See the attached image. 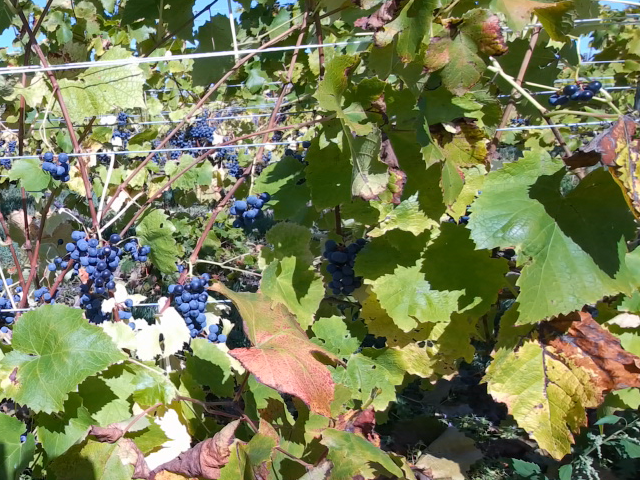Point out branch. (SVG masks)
I'll use <instances>...</instances> for the list:
<instances>
[{"instance_id": "30e6481e", "label": "branch", "mask_w": 640, "mask_h": 480, "mask_svg": "<svg viewBox=\"0 0 640 480\" xmlns=\"http://www.w3.org/2000/svg\"><path fill=\"white\" fill-rule=\"evenodd\" d=\"M57 192L56 188H52L51 191L48 194L47 197V201H46V206L44 207V209L41 212V217H40V224L38 227V237L35 241V247H34V254L32 256V246H31V240L29 237V223H28V214H27V210H26V192H25V188L21 187L20 188V195H21V213L23 215V225H24V240L26 242V249H27V259L30 263V268L31 271L29 272L28 275V282L26 284V280L25 277L23 275L21 266H20V262L19 259L17 257L16 251L13 248L12 245V238L10 235V231L9 228L6 225V222L4 220V214L0 213V225L4 231L5 234V238L7 241V247H8V251L11 254V257L14 261V265L19 277V280L21 282V286L22 289L24 291L23 293V297H22V302L20 304V307H25L27 305V299L29 296V293L31 291V287L32 284H34V288L38 289L39 288V281H38V275H37V259L39 256V249H40V244L41 241L43 239V230L45 227V220H46V214L49 211V209L51 208V203H52V199L55 195V193Z\"/></svg>"}, {"instance_id": "325d2c04", "label": "branch", "mask_w": 640, "mask_h": 480, "mask_svg": "<svg viewBox=\"0 0 640 480\" xmlns=\"http://www.w3.org/2000/svg\"><path fill=\"white\" fill-rule=\"evenodd\" d=\"M299 55V49H294V52L292 54L291 60L289 62V66H288V71H287V76H286V81L285 84L282 88V91L280 93V99L279 102L274 110V116L270 119V122L267 124L266 129H260L258 131H255L253 133H249L247 135H242V136H237L234 137L232 139H227V140H223L220 142V145H224V144H234L236 142L239 141H244V140H249L251 138H255L257 136L263 135L262 137V142L267 141L268 136L270 133H276V132H282L288 129H295V128H302V127H307L310 126L312 124L315 123H324V122H329L335 118L338 117L337 113H332L331 115L327 116V117H322V118H313L310 119L308 121L305 122H300V123H293V124H286L280 127H273V125L275 124L278 116H279V112L282 109V106L284 105L285 102V95L287 93V90L290 86L291 83V78H292V74H293V68L294 65L296 63V59Z\"/></svg>"}, {"instance_id": "170604dd", "label": "branch", "mask_w": 640, "mask_h": 480, "mask_svg": "<svg viewBox=\"0 0 640 480\" xmlns=\"http://www.w3.org/2000/svg\"><path fill=\"white\" fill-rule=\"evenodd\" d=\"M541 33V28H534L528 45L526 47V50L523 54L522 60H521V64H520V68H519V72L517 73L516 77L514 80H511L502 70V68L500 67V65L498 64L497 60L495 58H492L490 60V64L493 67V69L495 70L496 74L500 77V79L502 81H504L509 87H512L514 90H516L525 100L531 102L536 109L538 110V113L542 116V118L548 123V124H552L554 122V119L547 113V111L545 110L544 106L542 105V103L533 95L527 93V91L525 89H523L519 84L522 82V79L524 78L525 74H526V70H527V66H528V62L530 60V56L535 48V44L536 41L539 37Z\"/></svg>"}, {"instance_id": "45aa463d", "label": "branch", "mask_w": 640, "mask_h": 480, "mask_svg": "<svg viewBox=\"0 0 640 480\" xmlns=\"http://www.w3.org/2000/svg\"><path fill=\"white\" fill-rule=\"evenodd\" d=\"M310 2L312 4L313 11H314V14H315L317 44H322L321 20H323L324 18L331 17L333 15L341 14V13L344 12V9L343 8L334 9V10H330L329 12L322 13L320 15L317 2L315 0H312V1L311 0H305L304 9H303V21L298 23V24H296L294 27L287 28L286 30L282 31L281 34H279L278 36H276V37H274V38H272V39H270L268 41H265L264 43L260 44L258 46V49L266 48L267 46H270V45L282 40L288 34L296 32L299 29H301V30H300V32L298 34V37H297V40H296V44H301L303 36H304V34L306 32V28H307L308 12H309Z\"/></svg>"}, {"instance_id": "982ccf7c", "label": "branch", "mask_w": 640, "mask_h": 480, "mask_svg": "<svg viewBox=\"0 0 640 480\" xmlns=\"http://www.w3.org/2000/svg\"><path fill=\"white\" fill-rule=\"evenodd\" d=\"M264 151V147L258 148V152L256 153V156L252 158V162L250 165H248L245 170L243 171V173L235 180L233 186L231 187V189L229 190V193L221 200L220 204L217 206V208L215 210L212 211V213L210 214V216L208 217V221L206 223V226L203 229V232L200 236V239L198 240V242L196 243V246L193 249V253L189 259L190 263H194L195 259L198 255V252L201 248V246L203 245L205 238L211 228V225L213 223V220L215 219V216L217 214H219L223 207L225 206V204L230 200V198L234 195L235 191L238 189L240 183L247 177V175L249 174V172L258 164V162L260 161V158L263 154Z\"/></svg>"}, {"instance_id": "1ff4a987", "label": "branch", "mask_w": 640, "mask_h": 480, "mask_svg": "<svg viewBox=\"0 0 640 480\" xmlns=\"http://www.w3.org/2000/svg\"><path fill=\"white\" fill-rule=\"evenodd\" d=\"M12 3L14 5L16 11L19 13L20 20L23 23V26H24L25 30L29 34V38H28V41H27L26 49H25V52H24V55H23V65L24 66L28 65V58H29V55H30V52H31L32 44L34 45L36 51L38 52V54H39V56L41 58L42 64H49V62L47 61L46 56H45L40 44L38 43V41H37L35 36L37 35V32H38L39 27L41 25L42 19L45 17L47 12L49 11L50 6L53 3V0H48L45 3V6H44L43 10L41 11V13L39 14V16L36 19V22H35V25L33 27V30L31 29L30 25L28 24V21L26 20V17H25V14H24V10L20 7V4H19L18 0H12Z\"/></svg>"}, {"instance_id": "ea751061", "label": "branch", "mask_w": 640, "mask_h": 480, "mask_svg": "<svg viewBox=\"0 0 640 480\" xmlns=\"http://www.w3.org/2000/svg\"><path fill=\"white\" fill-rule=\"evenodd\" d=\"M216 153V150H209L208 152L200 155L197 159H195L193 161L192 164L187 165L183 170H181L179 173H177L173 179H171L169 182H167L164 186H162L156 193H153L151 195V197L149 198V200L146 202V204H144L142 207H140L137 211H136V215L134 216V218L124 227L121 228L120 232H119V236L123 237L126 233V231L130 230L131 227L134 226V224H136L139 221V218L141 217V214L148 209L151 204L154 202V200L156 199V197H160L164 191H166L167 189H169L173 184H175L182 176H184L188 171L194 169L197 167V165L202 162L203 160L207 159L208 157L212 156L213 154Z\"/></svg>"}, {"instance_id": "ca6c30ca", "label": "branch", "mask_w": 640, "mask_h": 480, "mask_svg": "<svg viewBox=\"0 0 640 480\" xmlns=\"http://www.w3.org/2000/svg\"><path fill=\"white\" fill-rule=\"evenodd\" d=\"M254 57V55H247L245 56L240 62H236L234 65L229 67V71L226 72V74H224L215 84H213L210 88H208L205 92L204 95L201 97V99L197 102V104L195 105V107L191 110V112L182 120L181 123H178L175 128L171 131V133L158 145V147L163 148L165 142L172 136L174 135L180 128H182L183 126H185L190 119L196 114V112L200 109V107L203 105V103L206 101V99L209 97L210 93H212L213 91H215L217 88L220 87V85L226 81L227 79H231L232 75L234 73H236L238 70H240L245 63H247L249 60H252Z\"/></svg>"}, {"instance_id": "1d269e1b", "label": "branch", "mask_w": 640, "mask_h": 480, "mask_svg": "<svg viewBox=\"0 0 640 480\" xmlns=\"http://www.w3.org/2000/svg\"><path fill=\"white\" fill-rule=\"evenodd\" d=\"M47 75H48V78H49V80H50V82L52 84V87H53L54 91H55V96L57 98L58 104L61 107V110H62V113H63V116H64V124L70 130L72 147L74 148L75 152H80V149H79L78 145L81 144V142L83 141L85 135L91 129L93 122L96 120V116L92 115L89 118V120L87 122V125L81 131V133L79 134L78 138L76 139V130H75L74 126H73V122L71 121V117L68 114L67 107H66V105H65V103L63 101V98L61 96L60 89H59V87L57 85L56 79L54 78L52 72H47Z\"/></svg>"}, {"instance_id": "1af6ec82", "label": "branch", "mask_w": 640, "mask_h": 480, "mask_svg": "<svg viewBox=\"0 0 640 480\" xmlns=\"http://www.w3.org/2000/svg\"><path fill=\"white\" fill-rule=\"evenodd\" d=\"M155 157V153L151 152L143 161H141L128 175L127 179L121 186L111 195L103 209L101 210V215L105 216L115 199L120 195V193L130 184L133 180L134 176L153 158Z\"/></svg>"}, {"instance_id": "2b1400db", "label": "branch", "mask_w": 640, "mask_h": 480, "mask_svg": "<svg viewBox=\"0 0 640 480\" xmlns=\"http://www.w3.org/2000/svg\"><path fill=\"white\" fill-rule=\"evenodd\" d=\"M77 161H78L79 172H80V175H81L82 183L84 185L85 197L87 199V203H88V206H89V213H90V215L92 217V221H93V229L94 230H98L99 229V223H98L96 212L94 210V203H93L92 197L90 195L89 183L87 181V177H86V173H85V169H84V164H83V159L81 157H78Z\"/></svg>"}, {"instance_id": "8bde2521", "label": "branch", "mask_w": 640, "mask_h": 480, "mask_svg": "<svg viewBox=\"0 0 640 480\" xmlns=\"http://www.w3.org/2000/svg\"><path fill=\"white\" fill-rule=\"evenodd\" d=\"M551 131L555 135V137L559 140L560 145L562 146L565 155L569 159H572L574 157V153L571 151L570 146L567 143V140L564 137V135L561 133V131L559 129H551Z\"/></svg>"}, {"instance_id": "a944a4c4", "label": "branch", "mask_w": 640, "mask_h": 480, "mask_svg": "<svg viewBox=\"0 0 640 480\" xmlns=\"http://www.w3.org/2000/svg\"><path fill=\"white\" fill-rule=\"evenodd\" d=\"M75 264V261L73 259L69 260V264L64 268L63 272L60 274V276L53 282L51 288H50V295L54 296L55 295V291L57 286L65 279L66 275L68 274V272L73 268Z\"/></svg>"}, {"instance_id": "afce2bb1", "label": "branch", "mask_w": 640, "mask_h": 480, "mask_svg": "<svg viewBox=\"0 0 640 480\" xmlns=\"http://www.w3.org/2000/svg\"><path fill=\"white\" fill-rule=\"evenodd\" d=\"M515 103H516V99L514 97H511L508 100V102H507V104L505 106V109L503 110V112H502V114L500 116V119H499V126L500 127L506 126V121H507L508 116L510 115V113L512 111V108L514 107Z\"/></svg>"}, {"instance_id": "7c5c6f52", "label": "branch", "mask_w": 640, "mask_h": 480, "mask_svg": "<svg viewBox=\"0 0 640 480\" xmlns=\"http://www.w3.org/2000/svg\"><path fill=\"white\" fill-rule=\"evenodd\" d=\"M501 137H502V132H497L496 131L495 134H494V137L492 139V142H491V144H490V146L488 148V152L490 154H493L495 152Z\"/></svg>"}, {"instance_id": "46de074c", "label": "branch", "mask_w": 640, "mask_h": 480, "mask_svg": "<svg viewBox=\"0 0 640 480\" xmlns=\"http://www.w3.org/2000/svg\"><path fill=\"white\" fill-rule=\"evenodd\" d=\"M174 299L173 295H169L167 301L163 304V306L160 309V313L164 314L166 309L171 305L172 301Z\"/></svg>"}, {"instance_id": "725ea6d5", "label": "branch", "mask_w": 640, "mask_h": 480, "mask_svg": "<svg viewBox=\"0 0 640 480\" xmlns=\"http://www.w3.org/2000/svg\"><path fill=\"white\" fill-rule=\"evenodd\" d=\"M189 272H190V264H189V263H186V264H185V269H184V271L181 273V275H180V277H179V282H180V283H183V282H184V279H185V278H186V276L189 274Z\"/></svg>"}]
</instances>
